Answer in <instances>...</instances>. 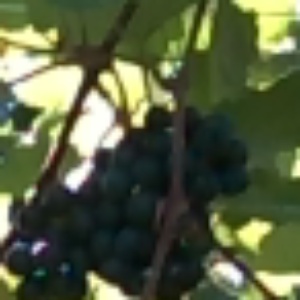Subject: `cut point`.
<instances>
[{"mask_svg": "<svg viewBox=\"0 0 300 300\" xmlns=\"http://www.w3.org/2000/svg\"><path fill=\"white\" fill-rule=\"evenodd\" d=\"M106 71H109L112 79L119 91V106L111 99V95L108 90L101 86L99 82L94 84V87L98 90L104 101L111 105L114 113V120L117 126H121L124 132H128L134 129L132 113L129 112V95L126 89H123L117 74L115 72V62L111 61L108 66L105 67Z\"/></svg>", "mask_w": 300, "mask_h": 300, "instance_id": "6a23745f", "label": "cut point"}]
</instances>
